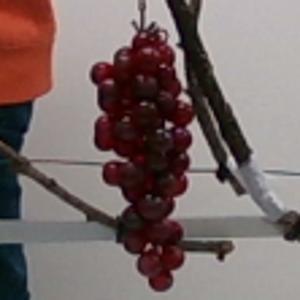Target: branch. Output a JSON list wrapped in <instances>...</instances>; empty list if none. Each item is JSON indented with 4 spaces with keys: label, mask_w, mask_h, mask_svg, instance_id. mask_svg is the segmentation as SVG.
Instances as JSON below:
<instances>
[{
    "label": "branch",
    "mask_w": 300,
    "mask_h": 300,
    "mask_svg": "<svg viewBox=\"0 0 300 300\" xmlns=\"http://www.w3.org/2000/svg\"><path fill=\"white\" fill-rule=\"evenodd\" d=\"M183 253L215 255L219 263L226 262V256L232 255L237 249L233 240H187L178 245Z\"/></svg>",
    "instance_id": "3"
},
{
    "label": "branch",
    "mask_w": 300,
    "mask_h": 300,
    "mask_svg": "<svg viewBox=\"0 0 300 300\" xmlns=\"http://www.w3.org/2000/svg\"><path fill=\"white\" fill-rule=\"evenodd\" d=\"M0 150L8 158L11 167L16 173L25 177L27 180L36 183L54 197L63 201L66 205L85 215L86 224L95 223L112 230L115 234V243L122 246L123 236L129 231L122 223V213L113 217L98 209L90 202L72 194L67 188L59 184L57 178L46 175L31 164L26 156L18 154L1 136Z\"/></svg>",
    "instance_id": "2"
},
{
    "label": "branch",
    "mask_w": 300,
    "mask_h": 300,
    "mask_svg": "<svg viewBox=\"0 0 300 300\" xmlns=\"http://www.w3.org/2000/svg\"><path fill=\"white\" fill-rule=\"evenodd\" d=\"M172 19L182 54V92L195 110L197 125L216 163L213 175L228 184L236 198L247 195L277 229L283 240L300 244V212L274 199L254 149L216 77L201 37L199 20L204 0H163ZM222 141H223L225 144H226L228 150H229L230 155L232 156L233 162L235 163V165H236V168H233V167H232V163H231L230 158H229V155H228V153H227V151L225 150L223 144H222Z\"/></svg>",
    "instance_id": "1"
}]
</instances>
